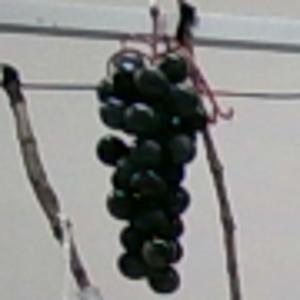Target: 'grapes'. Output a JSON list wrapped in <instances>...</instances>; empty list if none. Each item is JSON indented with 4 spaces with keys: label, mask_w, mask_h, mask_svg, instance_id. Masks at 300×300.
Returning a JSON list of instances; mask_svg holds the SVG:
<instances>
[{
    "label": "grapes",
    "mask_w": 300,
    "mask_h": 300,
    "mask_svg": "<svg viewBox=\"0 0 300 300\" xmlns=\"http://www.w3.org/2000/svg\"><path fill=\"white\" fill-rule=\"evenodd\" d=\"M194 71L193 61L175 52L161 58L159 69L126 58L96 89L100 123L135 135L133 146L118 134L102 137L96 146L98 161L115 166L106 198L108 214L126 222L118 233L125 252L116 269L132 282L146 278L148 289L157 295L174 294L182 284L175 268L184 256L180 217L190 211L192 199L180 185L184 165L199 154L196 132L210 121L201 92L183 87Z\"/></svg>",
    "instance_id": "01657485"
}]
</instances>
